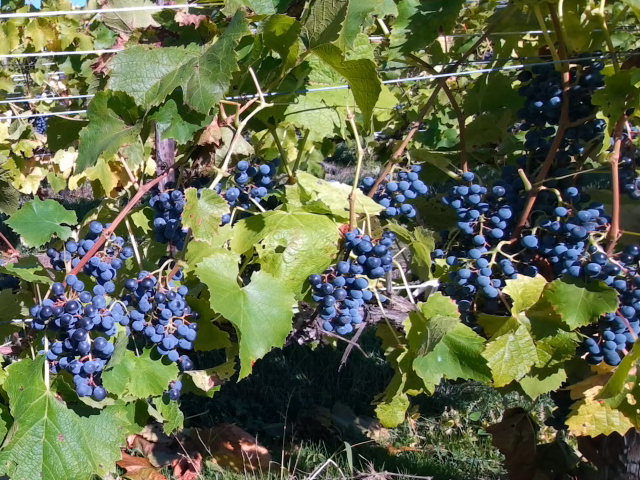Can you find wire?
<instances>
[{
  "instance_id": "34cfc8c6",
  "label": "wire",
  "mask_w": 640,
  "mask_h": 480,
  "mask_svg": "<svg viewBox=\"0 0 640 480\" xmlns=\"http://www.w3.org/2000/svg\"><path fill=\"white\" fill-rule=\"evenodd\" d=\"M349 89H350L349 85H342L339 87H318V88L296 90L295 94L305 95V94L320 93V92H342Z\"/></svg>"
},
{
  "instance_id": "f0478fcc",
  "label": "wire",
  "mask_w": 640,
  "mask_h": 480,
  "mask_svg": "<svg viewBox=\"0 0 640 480\" xmlns=\"http://www.w3.org/2000/svg\"><path fill=\"white\" fill-rule=\"evenodd\" d=\"M87 109H67L61 111H48V112H36L29 113L25 115H4L0 116V121L6 120H27L31 118H39V117H50V116H64L69 114L79 115V114H87Z\"/></svg>"
},
{
  "instance_id": "a73af890",
  "label": "wire",
  "mask_w": 640,
  "mask_h": 480,
  "mask_svg": "<svg viewBox=\"0 0 640 480\" xmlns=\"http://www.w3.org/2000/svg\"><path fill=\"white\" fill-rule=\"evenodd\" d=\"M199 2L189 4H165L160 6H144L138 8H92L87 10H51L41 12H26L22 14H0V19H25L28 17H43L53 15H80L86 16L95 13H140L146 11H162L167 9H191L198 8Z\"/></svg>"
},
{
  "instance_id": "d2f4af69",
  "label": "wire",
  "mask_w": 640,
  "mask_h": 480,
  "mask_svg": "<svg viewBox=\"0 0 640 480\" xmlns=\"http://www.w3.org/2000/svg\"><path fill=\"white\" fill-rule=\"evenodd\" d=\"M612 58H613L612 54L559 57L555 59H549V60H544V61H539L534 63H527V64L526 63L509 64V65L494 66L490 68L475 69V70H468V71H455L450 73H437V74H426V75H412L407 77L383 80L380 82V85L385 86V85H391V84L403 83V82H409V81H415V80H429V79H439V78H452L457 76H470V75L492 73L496 71L511 70V69H529V68H536V67H541V66H546L551 64H557L561 62L601 60V59H612Z\"/></svg>"
},
{
  "instance_id": "a009ed1b",
  "label": "wire",
  "mask_w": 640,
  "mask_h": 480,
  "mask_svg": "<svg viewBox=\"0 0 640 480\" xmlns=\"http://www.w3.org/2000/svg\"><path fill=\"white\" fill-rule=\"evenodd\" d=\"M290 91L289 90H284V91H273V92H262L260 93H248V94H242V95H230L226 97L227 101H232V100H244V99H250V98H260L262 97H275V96H286L289 95Z\"/></svg>"
},
{
  "instance_id": "4f2155b8",
  "label": "wire",
  "mask_w": 640,
  "mask_h": 480,
  "mask_svg": "<svg viewBox=\"0 0 640 480\" xmlns=\"http://www.w3.org/2000/svg\"><path fill=\"white\" fill-rule=\"evenodd\" d=\"M118 48H92V49H81L75 51H64V50H43L36 52H26V53H0V58H21L26 59L27 57H36V56H81L83 54H94V53H118Z\"/></svg>"
}]
</instances>
